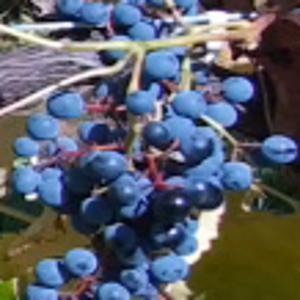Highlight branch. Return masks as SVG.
I'll use <instances>...</instances> for the list:
<instances>
[{
	"mask_svg": "<svg viewBox=\"0 0 300 300\" xmlns=\"http://www.w3.org/2000/svg\"><path fill=\"white\" fill-rule=\"evenodd\" d=\"M277 19V13L272 10L265 11L261 17L255 21L249 29H223L213 35L196 36L187 39L185 36L172 39H159L152 42H120V41H101V42H70V41H55L47 39L40 34H34L32 41L40 45L42 48L88 52V51H134V52H151L164 48H176L187 46L212 45L217 44L227 38H250L258 37L264 33L267 27Z\"/></svg>",
	"mask_w": 300,
	"mask_h": 300,
	"instance_id": "branch-1",
	"label": "branch"
}]
</instances>
